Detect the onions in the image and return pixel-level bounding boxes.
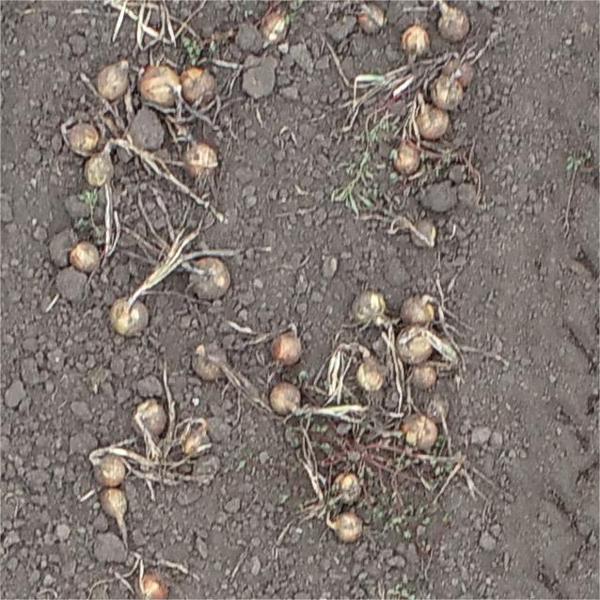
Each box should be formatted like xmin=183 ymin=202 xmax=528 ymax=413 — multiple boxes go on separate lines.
xmin=351 ymin=289 xmax=386 ymax=323
xmin=138 ymin=571 xmax=166 ymax=598
xmin=442 ymin=58 xmax=475 ymax=85
xmin=175 ymin=419 xmax=208 ymax=456
xmin=329 ymin=509 xmax=360 ymax=541
xmin=428 ymin=75 xmax=462 ymax=106
xmin=184 ymin=142 xmax=216 ymax=172
xmin=192 ymin=342 xmax=224 ymax=378
xmin=329 ymin=471 xmax=358 ymax=502
xmin=269 ymin=377 xmax=301 ymax=414
xmin=258 ymin=7 xmax=288 ymax=46
xmin=435 ymin=6 xmax=469 ymax=43
xmin=63 ymin=119 xmax=99 ymax=154
xmin=355 ymin=361 xmax=384 ymax=389
xmin=271 ymin=332 xmax=300 ymax=361
xmin=391 ymin=139 xmax=420 ymax=174
xmin=414 ymin=220 xmax=435 ymax=247
xmin=401 ymin=412 xmax=436 ymax=448
xmin=139 ymin=65 xmax=178 ymax=106
xmin=98 ymin=489 xmax=128 ymax=520
xmin=420 ymin=393 xmax=451 ymax=420
xmin=189 ymin=257 xmax=230 ymax=298
xmin=81 ymin=156 xmax=111 ymax=185
xmin=354 ymin=4 xmax=382 ymax=32
xmin=409 ymin=364 xmax=437 ymax=390
xmin=181 ymin=66 xmax=215 ymax=104
xmin=110 ymin=298 xmax=146 ymax=334
xmin=94 ymin=63 xmax=131 ymax=98
xmin=395 ymin=330 xmax=434 ymax=360
xmin=401 ymin=25 xmax=430 ymax=53
xmin=132 ymin=399 xmax=167 ymax=436
xmin=414 ymin=105 xmax=446 ymax=136
xmin=400 ymin=293 xmax=435 ymax=326
xmin=94 ymin=455 xmax=124 ymax=485
xmin=68 ymin=240 xmax=98 ymax=271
